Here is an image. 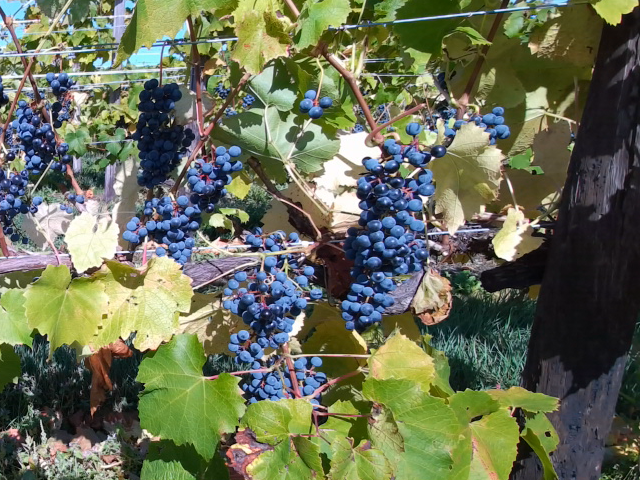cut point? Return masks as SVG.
<instances>
[{
  "instance_id": "6a23745f",
  "label": "cut point",
  "mask_w": 640,
  "mask_h": 480,
  "mask_svg": "<svg viewBox=\"0 0 640 480\" xmlns=\"http://www.w3.org/2000/svg\"><path fill=\"white\" fill-rule=\"evenodd\" d=\"M175 51L177 52V54L188 64L195 66V62L189 60L188 58L185 57V55L179 50L178 47H175Z\"/></svg>"
}]
</instances>
